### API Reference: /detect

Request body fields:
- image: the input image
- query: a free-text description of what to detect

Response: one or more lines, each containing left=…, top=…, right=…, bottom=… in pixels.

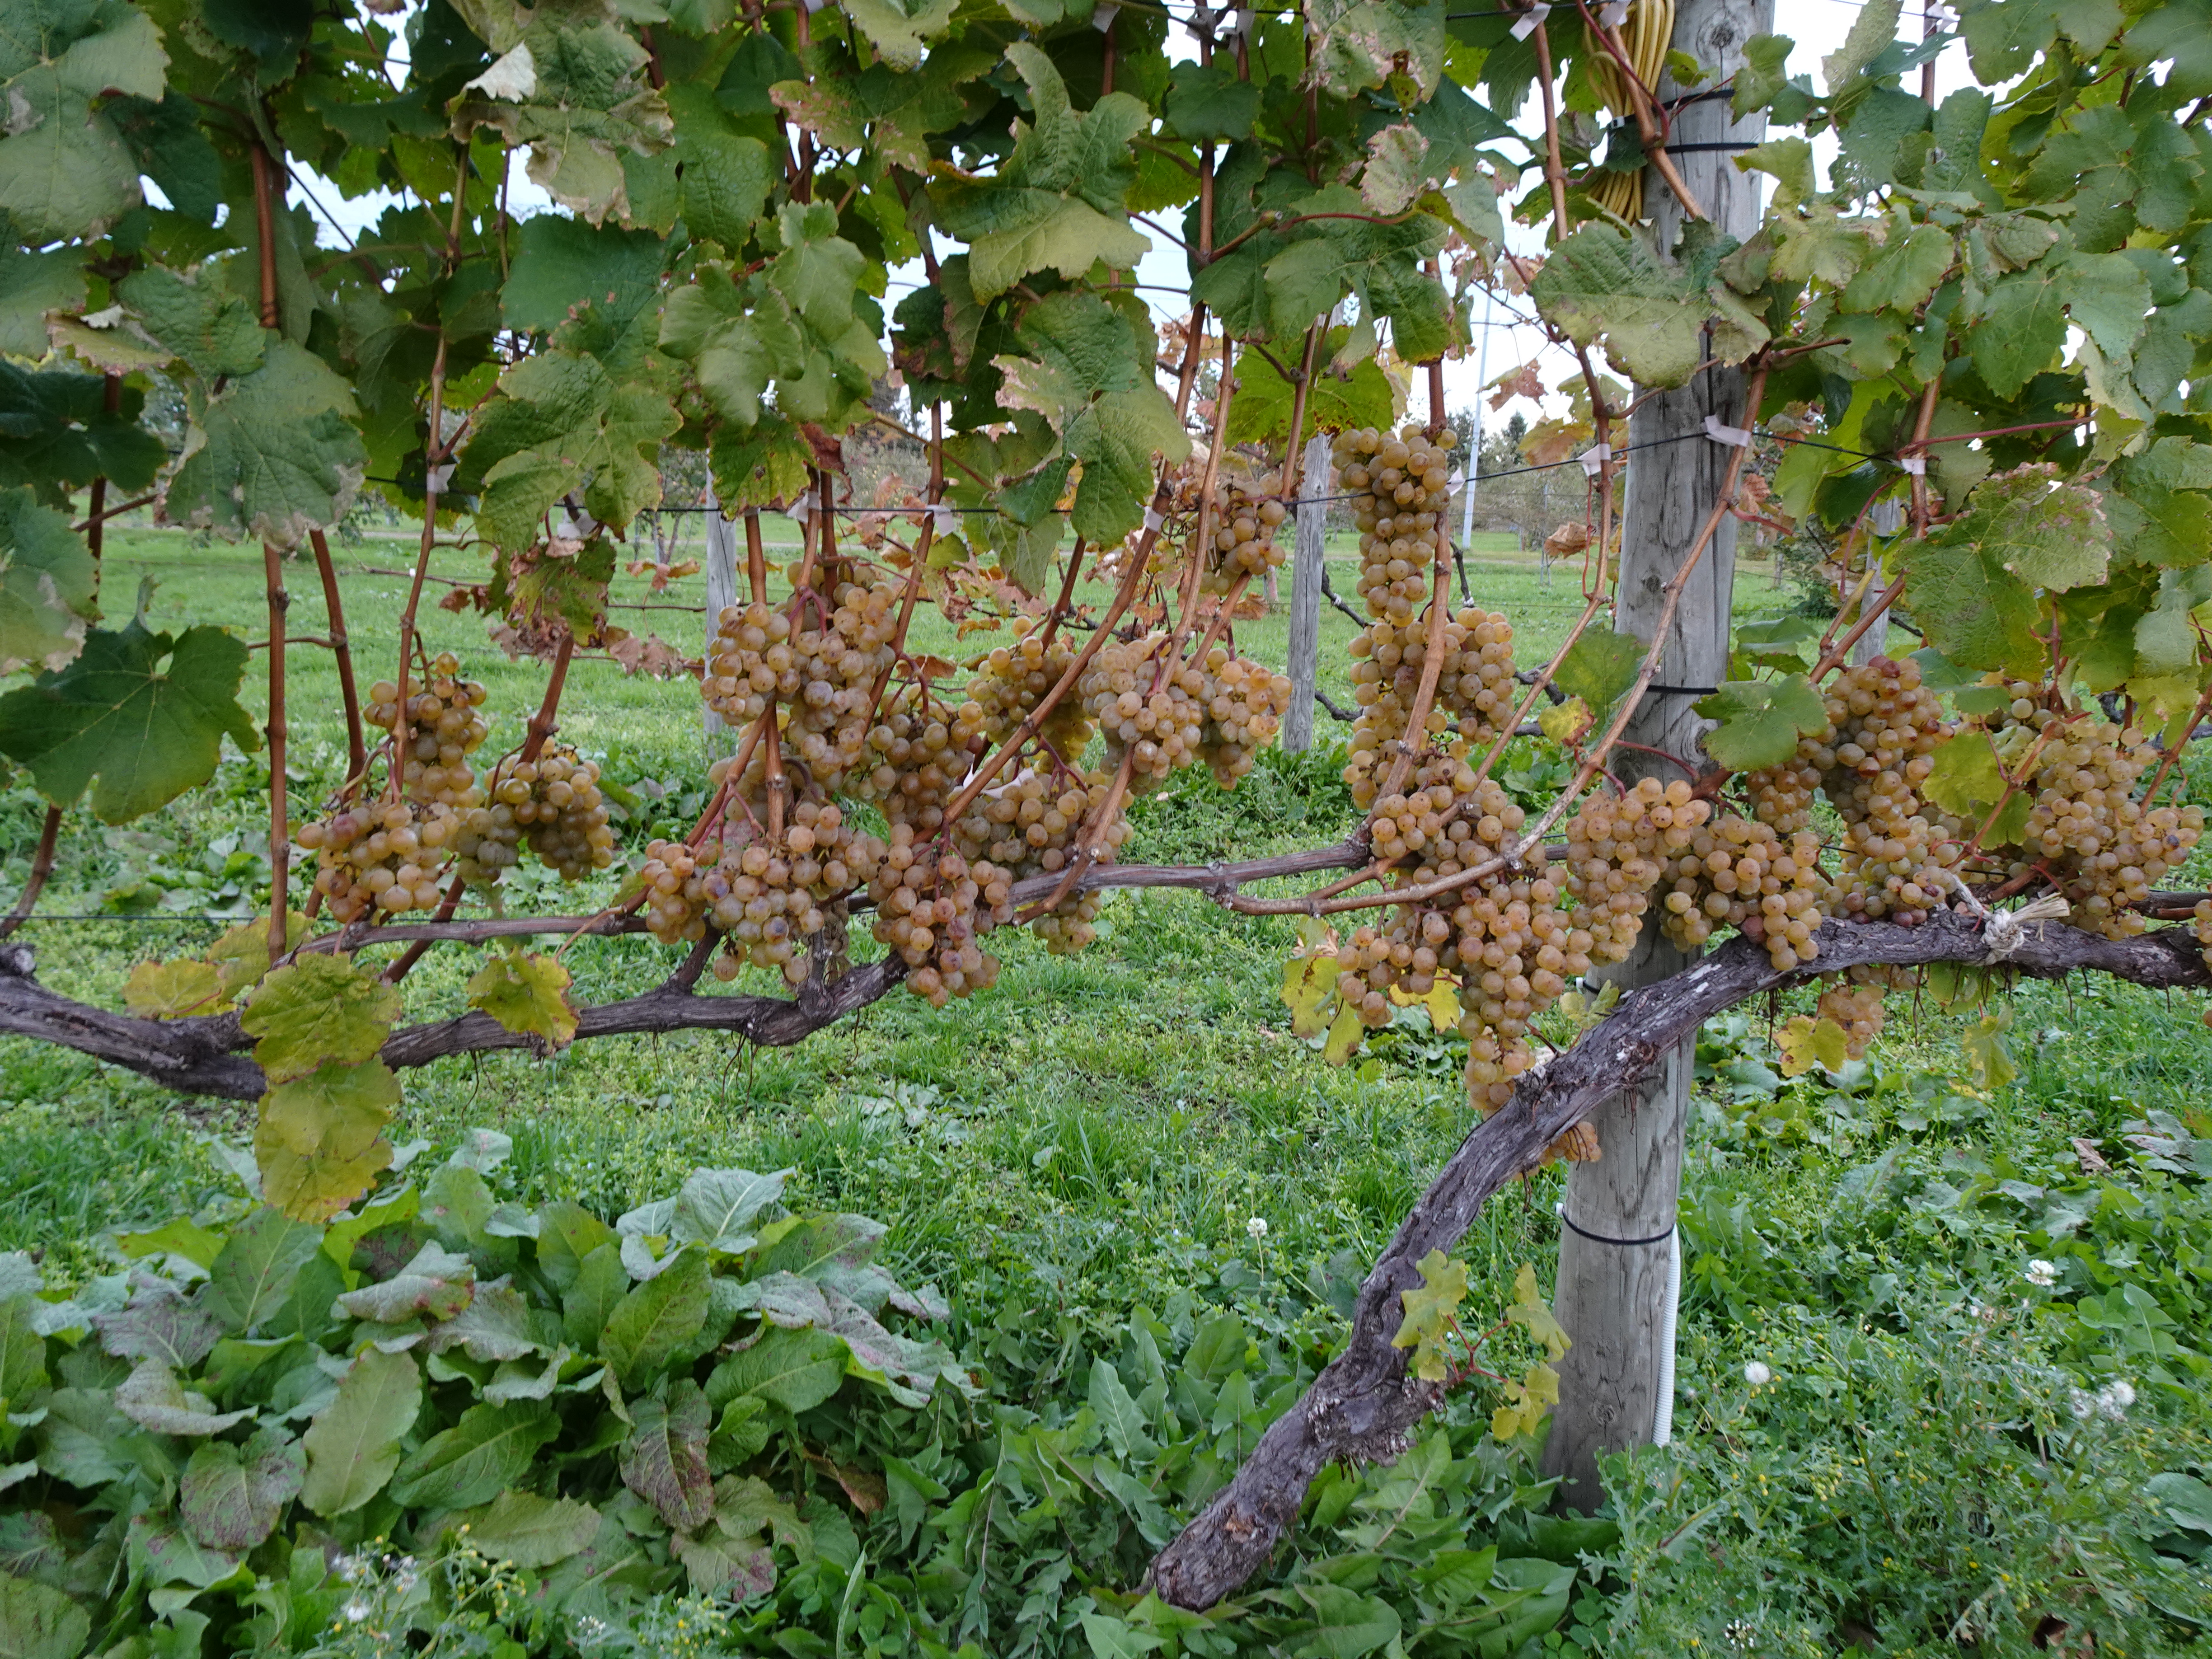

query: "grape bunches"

left=629, top=839, right=705, bottom=944
left=1810, top=654, right=1954, bottom=860
left=711, top=709, right=790, bottom=830
left=1948, top=837, right=2043, bottom=883
left=1371, top=757, right=1530, bottom=967
left=1337, top=926, right=1437, bottom=1026
left=1747, top=684, right=1849, bottom=833
left=371, top=801, right=459, bottom=913
left=2022, top=719, right=2157, bottom=858
left=363, top=652, right=490, bottom=818
left=1078, top=632, right=1205, bottom=798
left=1031, top=699, right=1093, bottom=773
left=1814, top=803, right=1980, bottom=991
left=1193, top=645, right=1292, bottom=792
left=979, top=751, right=1056, bottom=796
left=842, top=679, right=983, bottom=831
left=1332, top=424, right=1458, bottom=629
left=1726, top=821, right=1819, bottom=972
left=1185, top=488, right=1286, bottom=595
left=867, top=825, right=1012, bottom=1006
left=1953, top=681, right=2056, bottom=740
left=776, top=563, right=877, bottom=632
left=996, top=770, right=1134, bottom=961
left=298, top=800, right=391, bottom=920
left=775, top=626, right=897, bottom=799
left=940, top=785, right=1017, bottom=862
left=1404, top=604, right=1519, bottom=745
left=450, top=802, right=522, bottom=889
left=832, top=582, right=899, bottom=650
left=1818, top=969, right=1885, bottom=1061
left=1566, top=777, right=1709, bottom=966
left=1343, top=621, right=1471, bottom=808
left=1666, top=819, right=1736, bottom=955
left=1454, top=842, right=1592, bottom=1122
left=2061, top=805, right=2204, bottom=939
left=703, top=844, right=825, bottom=984
left=966, top=616, right=1075, bottom=748
left=2193, top=899, right=2212, bottom=975
left=789, top=799, right=889, bottom=890
left=486, top=735, right=615, bottom=882
left=702, top=602, right=791, bottom=726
